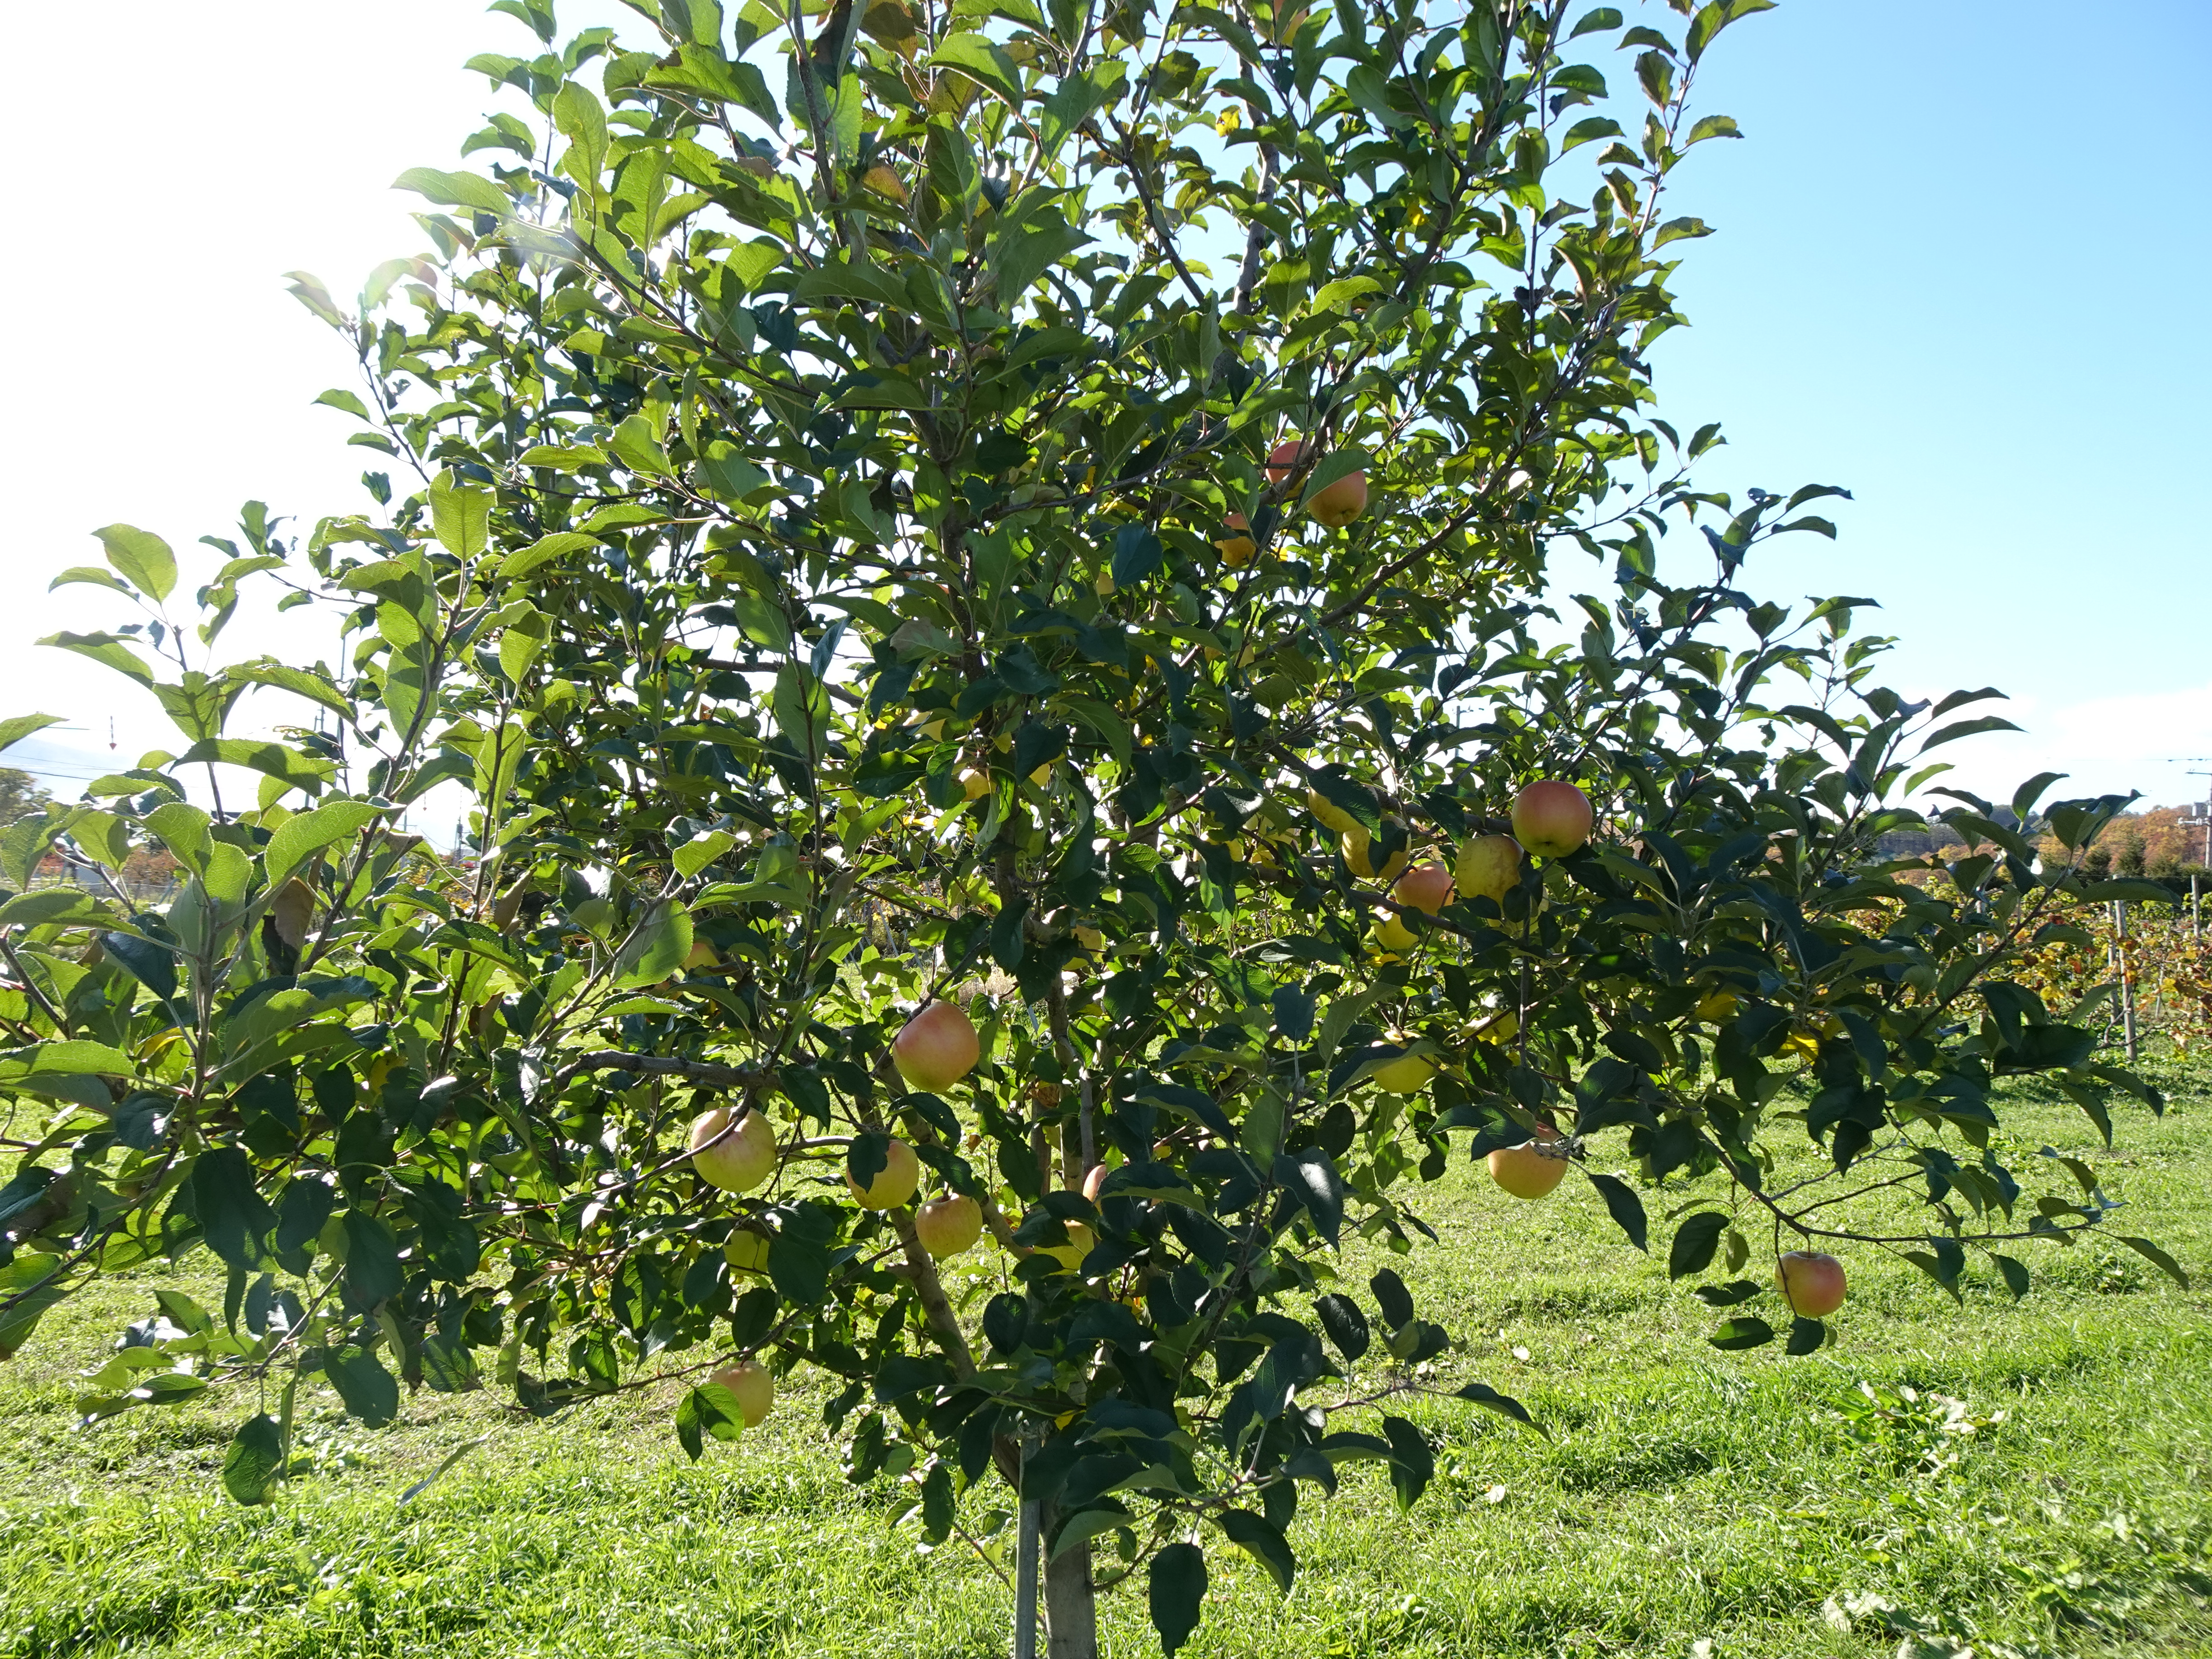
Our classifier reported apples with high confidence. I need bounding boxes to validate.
[690,1107,777,1193]
[1476,1006,1522,1042]
[1368,1028,1439,1096]
[1341,812,1413,880]
[1081,1159,1141,1228]
[1212,511,1259,567]
[1253,0,1312,47]
[1373,897,1421,952]
[956,763,1001,810]
[1510,779,1591,859]
[1054,1394,1097,1437]
[513,1280,560,1327]
[1108,493,1143,526]
[685,1223,733,1270]
[1247,850,1275,876]
[1190,828,1246,889]
[1023,1075,1063,1112]
[1007,751,1051,797]
[1077,566,1113,607]
[1489,1120,1571,1200]
[1305,457,1369,531]
[1450,833,1533,919]
[848,1141,920,1213]
[915,1189,985,1261]
[1030,1220,1095,1274]
[1150,1182,1176,1214]
[722,1219,774,1276]
[1080,467,1111,494]
[1263,439,1321,499]
[1258,814,1301,860]
[706,1360,775,1428]
[683,938,728,982]
[649,962,689,1002]
[1489,878,1551,939]
[48,1166,97,1209]
[1036,904,1105,972]
[369,1053,412,1099]
[638,640,693,682]
[1307,769,1383,835]
[1395,863,1455,922]
[893,998,980,1094]
[1695,980,1736,1022]
[1203,631,1260,686]
[904,710,962,763]
[1774,1247,1848,1317]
